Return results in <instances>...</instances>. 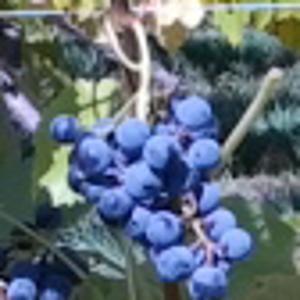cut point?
<instances>
[{"mask_svg":"<svg viewBox=\"0 0 300 300\" xmlns=\"http://www.w3.org/2000/svg\"><path fill=\"white\" fill-rule=\"evenodd\" d=\"M129 22L132 25L135 36L137 60L133 59L122 45V42L115 31L113 20L110 17H105L103 19L107 38L120 60L131 69L142 70L143 80L137 92V109L139 110V117L145 119L148 113L147 95L152 84L151 61L146 47V29L142 27L141 20L137 15H131L129 17Z\"/></svg>","mask_w":300,"mask_h":300,"instance_id":"cut-point-1","label":"cut point"}]
</instances>
